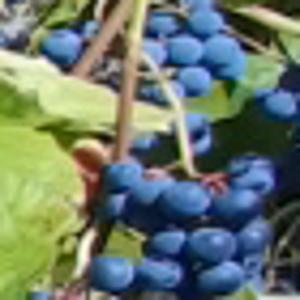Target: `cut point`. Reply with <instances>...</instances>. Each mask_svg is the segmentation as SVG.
<instances>
[{
    "label": "cut point",
    "instance_id": "6a23745f",
    "mask_svg": "<svg viewBox=\"0 0 300 300\" xmlns=\"http://www.w3.org/2000/svg\"><path fill=\"white\" fill-rule=\"evenodd\" d=\"M142 59H144L149 67L152 69V72L154 75L159 79V82L163 86L164 90L167 93L168 99L170 103L172 104V107L175 111L177 122H176V128L178 130L179 135V158H180V164L184 166V168L191 172L194 169V160L191 155V150L186 138V130H185V120L183 111L181 109V106L176 99L175 93L173 88L170 86L169 82L167 81L165 75L161 72L156 62L153 60V58L145 52L139 45L137 46V49L135 51Z\"/></svg>",
    "mask_w": 300,
    "mask_h": 300
}]
</instances>
